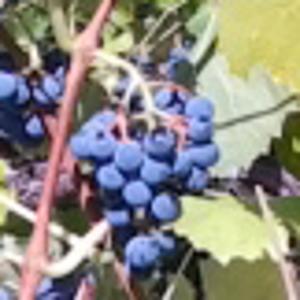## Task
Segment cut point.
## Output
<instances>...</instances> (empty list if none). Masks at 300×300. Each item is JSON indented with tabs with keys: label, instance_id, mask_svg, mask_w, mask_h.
<instances>
[{
	"label": "cut point",
	"instance_id": "6a23745f",
	"mask_svg": "<svg viewBox=\"0 0 300 300\" xmlns=\"http://www.w3.org/2000/svg\"><path fill=\"white\" fill-rule=\"evenodd\" d=\"M89 53L92 56H98V57L104 58L105 60H107L111 63H114V64L120 66L121 68H123L124 70H127L128 72H130L133 76L130 78V83L127 85V89L129 91L134 90L136 88L137 84L141 88H145L147 86V83L144 81L141 73L130 63H127L124 60L120 59L119 57L111 55L110 53L103 51L101 49L91 48L89 50Z\"/></svg>",
	"mask_w": 300,
	"mask_h": 300
}]
</instances>
